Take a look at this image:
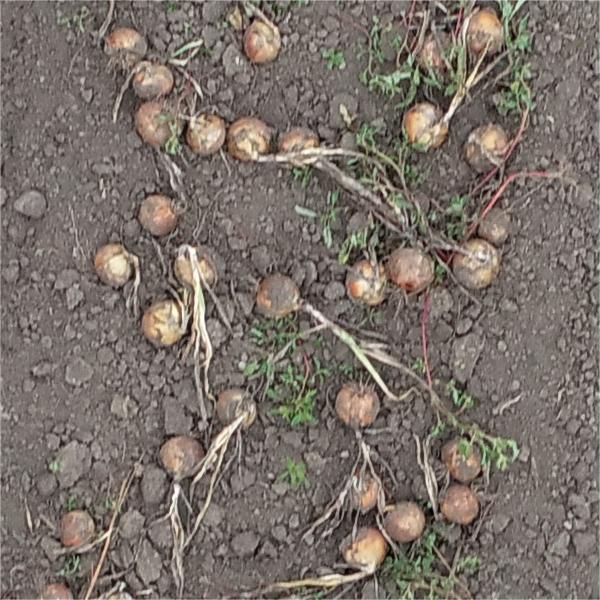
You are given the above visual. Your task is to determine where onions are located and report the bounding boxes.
[40,578,71,599]
[185,112,223,152]
[443,439,482,478]
[343,257,386,300]
[461,7,502,57]
[141,299,185,344]
[212,390,255,432]
[462,125,506,168]
[334,386,378,426]
[133,61,169,97]
[93,242,134,283]
[345,476,382,510]
[414,35,446,75]
[174,247,217,287]
[439,484,479,524]
[227,118,270,161]
[138,193,178,234]
[451,237,496,287]
[241,19,280,60]
[158,437,204,478]
[104,25,141,54]
[137,102,179,147]
[480,216,508,244]
[401,102,446,146]
[58,509,91,547]
[380,499,425,542]
[255,272,297,317]
[386,246,432,293]
[345,529,386,570]
[280,124,315,157]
